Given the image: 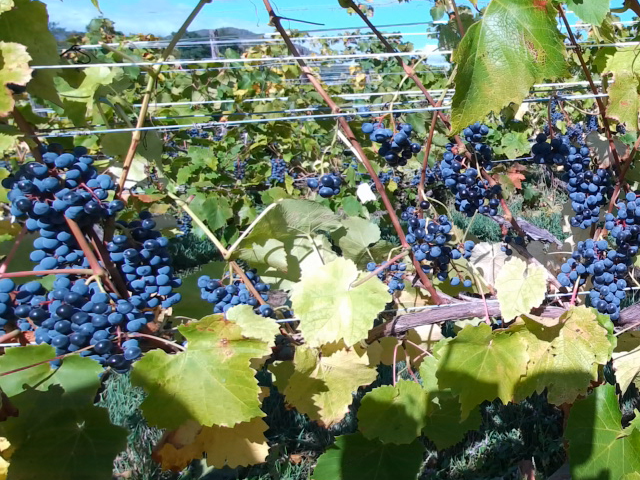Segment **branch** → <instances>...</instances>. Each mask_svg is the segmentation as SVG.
<instances>
[{"instance_id":"branch-10","label":"branch","mask_w":640,"mask_h":480,"mask_svg":"<svg viewBox=\"0 0 640 480\" xmlns=\"http://www.w3.org/2000/svg\"><path fill=\"white\" fill-rule=\"evenodd\" d=\"M160 73V67H153V70L151 71L149 78H148V82H147V88H146V94L144 96V101L142 102L141 108L137 114V125L138 126H143L144 125V116L147 113L148 107L151 103V99L153 97V90H154V84H155V80L158 76V74Z\"/></svg>"},{"instance_id":"branch-2","label":"branch","mask_w":640,"mask_h":480,"mask_svg":"<svg viewBox=\"0 0 640 480\" xmlns=\"http://www.w3.org/2000/svg\"><path fill=\"white\" fill-rule=\"evenodd\" d=\"M67 225L72 229L76 242L87 254L91 265V272L99 278L105 288L110 289L112 292H116L117 290L123 292L125 290L123 279L110 264L107 255L105 254L104 247L92 227L89 224H85L83 229L85 230L87 237L94 243L100 261L111 277L98 265L96 256L88 246L87 242L82 238V233L78 225L73 220H69Z\"/></svg>"},{"instance_id":"branch-1","label":"branch","mask_w":640,"mask_h":480,"mask_svg":"<svg viewBox=\"0 0 640 480\" xmlns=\"http://www.w3.org/2000/svg\"><path fill=\"white\" fill-rule=\"evenodd\" d=\"M338 122L340 124V126L342 127L343 132L345 133V135L347 136L348 140L350 141L351 146L353 147L354 151L359 155L366 171L367 174L370 177V180L373 182V184L375 185L376 189L378 190L379 193V197L381 198L382 203L384 204L385 208L387 209L388 215L390 220L393 222V224L396 227L398 236L400 237V240L402 242V245L404 246L405 250L407 251V254L409 256V259L411 261V263H413L414 265V269L417 272L418 276L420 277V279L422 280V282L424 283V286L426 288V290L428 292L431 293L433 301L435 304H442V300L440 299L439 296V292L437 291V289L435 287H433V285L431 284L430 279L428 278V276L425 274L424 270L421 267V263L418 260H414L413 258V252L411 251V246L409 245V243H406L405 241V230L403 228V225L401 223V221L399 220V218L396 215L394 206L392 205V203L390 202L387 194H386V190L383 187L380 179L377 177L373 166L371 165V163L369 162V158L366 154V152L361 148L360 144L358 143L356 137L354 136L353 132L351 131L349 124L346 122L344 117L338 118Z\"/></svg>"},{"instance_id":"branch-15","label":"branch","mask_w":640,"mask_h":480,"mask_svg":"<svg viewBox=\"0 0 640 480\" xmlns=\"http://www.w3.org/2000/svg\"><path fill=\"white\" fill-rule=\"evenodd\" d=\"M557 7H558V11H559V14H560L561 18L563 19V22L566 25V28H567V30L569 32V35L571 36L572 44H578L577 36H576V34H575V32H574V30L572 28L571 23L568 20L567 15L564 12L563 3L562 2H558L557 3Z\"/></svg>"},{"instance_id":"branch-5","label":"branch","mask_w":640,"mask_h":480,"mask_svg":"<svg viewBox=\"0 0 640 480\" xmlns=\"http://www.w3.org/2000/svg\"><path fill=\"white\" fill-rule=\"evenodd\" d=\"M437 116H439L444 123L446 124L448 129L452 128V123L449 120V118L442 112V111H434L432 113V123H431V127L429 130V134L427 137V142L425 144L424 147V151H423V161H422V165H421V171H420V180L418 183V202L423 201V186L425 183V174H426V168H427V164L429 163V159H428V153L432 144V140L434 137V133L436 130V125H437Z\"/></svg>"},{"instance_id":"branch-4","label":"branch","mask_w":640,"mask_h":480,"mask_svg":"<svg viewBox=\"0 0 640 480\" xmlns=\"http://www.w3.org/2000/svg\"><path fill=\"white\" fill-rule=\"evenodd\" d=\"M166 195L169 198H171L173 201H175L178 205H180L189 215L192 216V218L196 221V223L201 226V229L204 232V234L220 249L223 257L226 258L230 262V264L234 267L238 276L250 289L255 299L262 306H265L266 301L264 300V298L259 295L255 286L249 281V279L245 276V274L241 270V267L236 263L234 258L228 254L227 249L224 247V245L208 230L206 224L200 219V217L190 207H188L185 202H183L180 198L174 195L171 191H167Z\"/></svg>"},{"instance_id":"branch-16","label":"branch","mask_w":640,"mask_h":480,"mask_svg":"<svg viewBox=\"0 0 640 480\" xmlns=\"http://www.w3.org/2000/svg\"><path fill=\"white\" fill-rule=\"evenodd\" d=\"M453 140H454L455 144L457 145V147L462 151L464 156L467 158V160L471 164H475L476 160L471 156V154L468 152V150L463 146V144L461 143V141L459 140L457 135L453 136Z\"/></svg>"},{"instance_id":"branch-17","label":"branch","mask_w":640,"mask_h":480,"mask_svg":"<svg viewBox=\"0 0 640 480\" xmlns=\"http://www.w3.org/2000/svg\"><path fill=\"white\" fill-rule=\"evenodd\" d=\"M479 173L485 176V178L488 180V182L490 183L491 186H495L496 185L495 180L492 178V176L486 170L480 169Z\"/></svg>"},{"instance_id":"branch-3","label":"branch","mask_w":640,"mask_h":480,"mask_svg":"<svg viewBox=\"0 0 640 480\" xmlns=\"http://www.w3.org/2000/svg\"><path fill=\"white\" fill-rule=\"evenodd\" d=\"M595 101L598 105V110H599V115H600V119L602 121V124L606 130V134H607V138L609 141V144L611 146V151H612V156H613V161L618 169L619 172V176H618V181H617V185L615 187V190L613 191L612 195H611V199L609 201L608 204V210L612 211L613 210V206L615 204L616 198L621 190V188H623V190L625 192L629 191V187L627 185V181H626V170L628 169V166L632 160L633 155L635 154L637 148L639 147L640 144V137H637L635 139V142L631 148V150L628 152L627 154V158L622 166L619 158H618V153H617V149H616V144L614 142L613 136H612V132H611V128L609 126V123L605 117V113H604V108H603V103L601 101V99L599 97L595 98Z\"/></svg>"},{"instance_id":"branch-14","label":"branch","mask_w":640,"mask_h":480,"mask_svg":"<svg viewBox=\"0 0 640 480\" xmlns=\"http://www.w3.org/2000/svg\"><path fill=\"white\" fill-rule=\"evenodd\" d=\"M574 50L578 54V58L580 59V62L582 64L583 69L585 71V74H586V76H587V78H588V80L590 82V86L592 87L593 92H598V87H597V85L595 83V79H594V77L592 76V74L590 72L589 66H588V64H587V62L585 60V57L583 55L582 50L581 49H574Z\"/></svg>"},{"instance_id":"branch-11","label":"branch","mask_w":640,"mask_h":480,"mask_svg":"<svg viewBox=\"0 0 640 480\" xmlns=\"http://www.w3.org/2000/svg\"><path fill=\"white\" fill-rule=\"evenodd\" d=\"M264 7L266 8V10L268 12L269 18L272 20L275 28L279 32V34H280L281 38L283 39V41L285 42V45L292 52V55H300L299 49L294 45V43L290 39L288 33L286 32V29L283 27L281 21L279 20L278 16L276 15L275 9L272 6V4L270 2H266L264 4Z\"/></svg>"},{"instance_id":"branch-8","label":"branch","mask_w":640,"mask_h":480,"mask_svg":"<svg viewBox=\"0 0 640 480\" xmlns=\"http://www.w3.org/2000/svg\"><path fill=\"white\" fill-rule=\"evenodd\" d=\"M141 138V133L139 131L135 132L132 138V142L131 145L129 147V149L126 152V156H125V163L121 169L120 172V178L118 180L117 186L114 190V196L116 198H119L121 196V193L123 191V188L125 186L126 180H127V174L131 168V165L133 163V154L135 153V151L137 150V147L139 145V141Z\"/></svg>"},{"instance_id":"branch-9","label":"branch","mask_w":640,"mask_h":480,"mask_svg":"<svg viewBox=\"0 0 640 480\" xmlns=\"http://www.w3.org/2000/svg\"><path fill=\"white\" fill-rule=\"evenodd\" d=\"M297 64L299 65L300 70L303 72V74L308 78V80L310 81V84L312 85L313 89L315 90V92L320 95L324 100L327 101V103L330 105V107L333 109V111L335 113H338L340 111V106L337 104V102L327 93V91L325 89H322L320 84L318 83L315 75L310 71V69L307 67L306 62L302 59V60H298Z\"/></svg>"},{"instance_id":"branch-13","label":"branch","mask_w":640,"mask_h":480,"mask_svg":"<svg viewBox=\"0 0 640 480\" xmlns=\"http://www.w3.org/2000/svg\"><path fill=\"white\" fill-rule=\"evenodd\" d=\"M497 197H498V199H499V201H500V203H501V205H502V207H503V209H504V211H505V214H506V216H507V219H508L509 223L511 224V226H512L513 230H514L515 232H517L518 234H522V233H523V230H522L521 228H519V227H518L517 223H516V222H515V220L513 219L512 214H511V211H510V209H509V207H508V204H507V202H506V200H505V198H504L503 194H502V193H498V194H497Z\"/></svg>"},{"instance_id":"branch-7","label":"branch","mask_w":640,"mask_h":480,"mask_svg":"<svg viewBox=\"0 0 640 480\" xmlns=\"http://www.w3.org/2000/svg\"><path fill=\"white\" fill-rule=\"evenodd\" d=\"M208 3V0H200L196 6L195 9L191 12V14L181 23V25L179 26L177 32L175 33V35L171 38V40L166 44L165 49L163 50V52L161 53V55L159 56V59L161 61H165L169 54L171 53L173 47L177 44V42L180 40V38L183 36L184 32L186 31L187 27L198 17V15L200 14V12L202 11V8Z\"/></svg>"},{"instance_id":"branch-6","label":"branch","mask_w":640,"mask_h":480,"mask_svg":"<svg viewBox=\"0 0 640 480\" xmlns=\"http://www.w3.org/2000/svg\"><path fill=\"white\" fill-rule=\"evenodd\" d=\"M396 60L398 61L399 64H401L404 68L407 69L409 75L412 77L413 81L415 82V84L417 85V87L419 88V90L423 93V95L425 96L426 100L431 103L433 106L436 105H442L443 99L446 96L447 91L449 90L450 84L453 80V78L455 77V75L458 73V67L454 66L452 72L449 74L445 85L441 91V93L438 96V100H434L433 97L429 94V92L427 91V89L423 86V84L421 83L420 79L418 78V76L416 75V73L414 72L413 68L406 63L402 57H396Z\"/></svg>"},{"instance_id":"branch-12","label":"branch","mask_w":640,"mask_h":480,"mask_svg":"<svg viewBox=\"0 0 640 480\" xmlns=\"http://www.w3.org/2000/svg\"><path fill=\"white\" fill-rule=\"evenodd\" d=\"M348 3L350 4L351 8L355 11V13L369 25L372 32L376 35L377 39L380 41L381 45L389 52H393L394 48L385 41L384 37L378 31L373 21L360 10V8L355 4L353 0H348Z\"/></svg>"}]
</instances>
